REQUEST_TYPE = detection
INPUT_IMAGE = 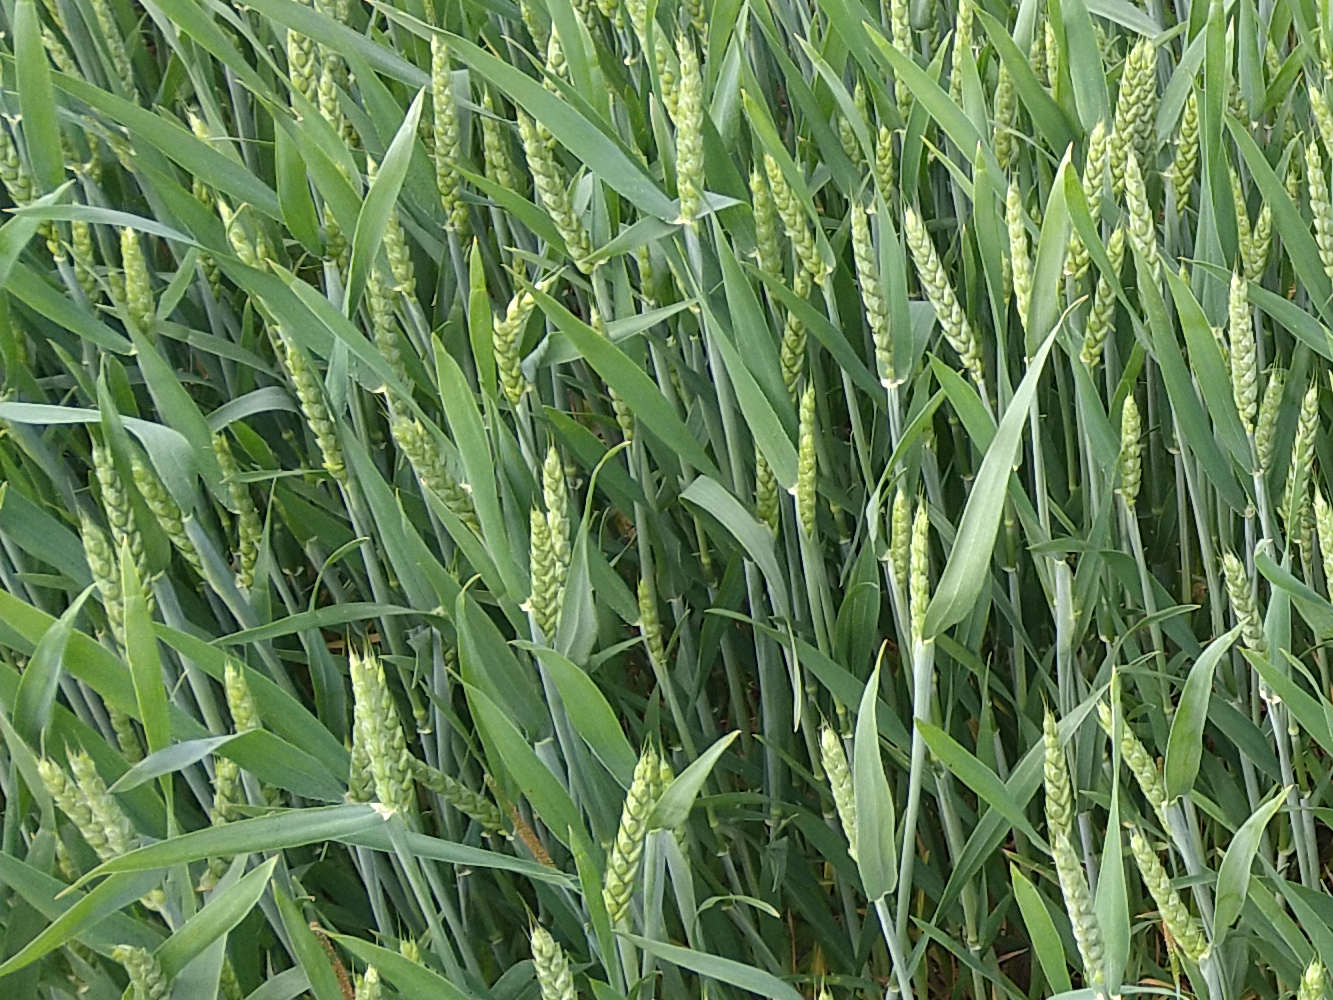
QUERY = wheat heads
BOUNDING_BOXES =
[540,24,569,149]
[993,59,1011,165]
[901,210,980,378]
[1317,494,1333,609]
[876,127,896,189]
[1129,835,1209,965]
[1135,47,1159,180]
[284,0,312,118]
[346,655,412,828]
[242,524,261,591]
[203,757,234,873]
[120,226,157,332]
[1291,962,1328,1000]
[888,0,909,106]
[505,284,546,404]
[211,433,258,529]
[389,417,482,539]
[428,48,471,233]
[661,764,692,862]
[218,212,261,273]
[758,445,781,534]
[556,0,605,42]
[398,947,460,1000]
[1230,164,1245,261]
[1176,94,1202,204]
[1305,143,1333,281]
[320,74,367,248]
[72,201,98,299]
[854,86,866,125]
[1264,37,1284,84]
[779,277,817,402]
[50,838,88,888]
[513,117,593,272]
[368,171,415,297]
[604,757,655,916]
[7,0,70,38]
[1285,176,1297,193]
[1251,206,1275,273]
[481,93,526,189]
[187,115,218,149]
[426,0,435,26]
[1228,276,1259,418]
[613,0,682,115]
[814,722,857,847]
[308,0,337,19]
[1118,396,1138,496]
[1087,19,1118,68]
[1080,234,1125,364]
[1308,80,1333,159]
[526,926,592,1000]
[848,202,897,380]
[219,663,262,733]
[530,512,563,645]
[91,446,153,610]
[1028,35,1044,89]
[1299,494,1315,562]
[35,763,144,901]
[948,0,975,114]
[676,43,700,230]
[797,395,819,542]
[1007,184,1034,323]
[340,0,352,18]
[1256,376,1285,470]
[1125,150,1162,303]
[750,170,783,309]
[1313,0,1330,60]
[405,754,513,836]
[611,383,632,448]
[221,963,243,1000]
[909,512,928,633]
[62,945,103,972]
[839,113,860,166]
[368,268,411,426]
[200,205,230,297]
[1091,705,1165,825]
[86,0,137,98]
[638,577,660,646]
[542,446,577,573]
[125,458,209,576]
[1284,384,1319,541]
[74,517,125,652]
[890,491,913,581]
[284,330,343,473]
[66,754,137,854]
[1041,711,1073,832]
[343,722,376,795]
[766,157,823,280]
[110,943,169,1000]
[1051,839,1107,985]
[1219,555,1263,652]
[672,0,710,27]
[52,115,79,165]
[1062,127,1110,276]
[1044,22,1070,89]
[1103,44,1142,188]
[0,132,52,234]
[321,48,347,138]
[40,24,79,79]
